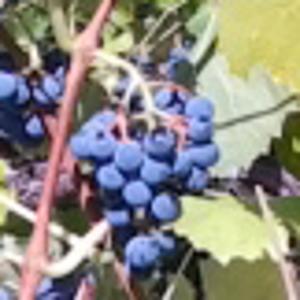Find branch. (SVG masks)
<instances>
[{
    "mask_svg": "<svg viewBox=\"0 0 300 300\" xmlns=\"http://www.w3.org/2000/svg\"><path fill=\"white\" fill-rule=\"evenodd\" d=\"M115 4L116 0H101L71 46L69 56L71 74L60 105L59 121L51 111H45L41 115V120L48 130L52 148L49 164L42 176L41 194L29 228L28 247L21 271V282L18 287L19 300H32L35 289L40 286L47 267L48 222L54 210L55 180L61 171V166L73 181L91 231L98 247L107 259L119 289L127 300H144L143 293L136 285L132 284L124 268L118 250L104 227L86 176L70 154L67 146L72 121L78 112L81 83L90 67L91 59L94 57L89 53V50L91 48L97 49V41L94 37Z\"/></svg>",
    "mask_w": 300,
    "mask_h": 300,
    "instance_id": "30e6481e",
    "label": "branch"
},
{
    "mask_svg": "<svg viewBox=\"0 0 300 300\" xmlns=\"http://www.w3.org/2000/svg\"><path fill=\"white\" fill-rule=\"evenodd\" d=\"M0 43L11 60L18 66L23 77L29 81L36 80L38 77L37 70L4 25H0Z\"/></svg>",
    "mask_w": 300,
    "mask_h": 300,
    "instance_id": "325d2c04",
    "label": "branch"
}]
</instances>
